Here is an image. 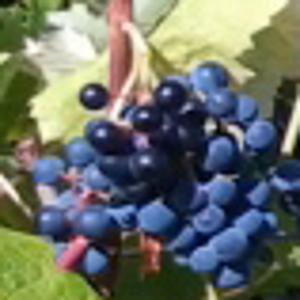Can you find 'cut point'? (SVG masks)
Returning a JSON list of instances; mask_svg holds the SVG:
<instances>
[{
    "mask_svg": "<svg viewBox=\"0 0 300 300\" xmlns=\"http://www.w3.org/2000/svg\"><path fill=\"white\" fill-rule=\"evenodd\" d=\"M127 35L134 49L135 56L132 70L124 81L121 93L129 95L138 82L136 102L138 104H143L145 101L152 103L154 101L153 88L156 86V80L150 63V50L140 29L132 21L127 28Z\"/></svg>",
    "mask_w": 300,
    "mask_h": 300,
    "instance_id": "6a23745f",
    "label": "cut point"
}]
</instances>
